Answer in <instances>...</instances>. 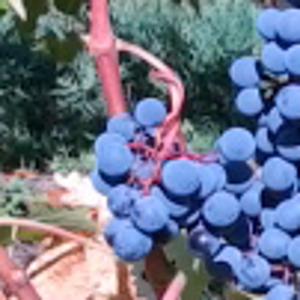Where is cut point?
<instances>
[{
  "mask_svg": "<svg viewBox=\"0 0 300 300\" xmlns=\"http://www.w3.org/2000/svg\"><path fill=\"white\" fill-rule=\"evenodd\" d=\"M113 46L120 51L133 53L142 58L147 64L160 71V76L164 80L171 94V115L179 118L184 111L185 91L182 85L180 74L175 68H171L162 60L154 57L151 52L138 44L127 43L121 39H115Z\"/></svg>",
  "mask_w": 300,
  "mask_h": 300,
  "instance_id": "cut-point-1",
  "label": "cut point"
}]
</instances>
